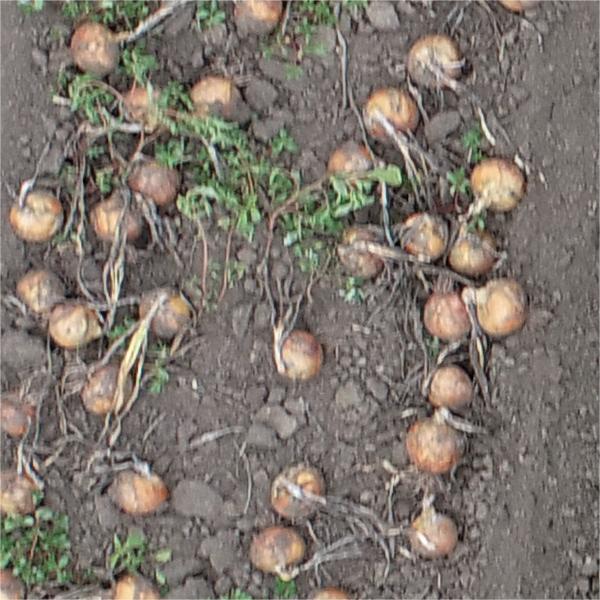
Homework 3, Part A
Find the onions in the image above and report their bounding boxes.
[424,293,468,338]
[0,397,35,438]
[408,32,461,90]
[364,88,417,134]
[11,190,60,240]
[113,573,162,599]
[427,365,472,408]
[117,80,151,121]
[80,363,129,415]
[450,235,493,274]
[343,222,383,250]
[269,464,322,520]
[0,570,26,599]
[494,0,544,9]
[476,281,526,335]
[404,415,462,471]
[47,301,98,346]
[401,213,448,260]
[69,21,121,75]
[277,331,320,378]
[340,240,381,280]
[327,141,372,180]
[236,0,282,36]
[113,470,166,514]
[409,513,456,557]
[470,158,525,209]
[147,295,192,343]
[251,525,306,575]
[127,160,179,206]
[91,198,140,241]
[16,268,62,311]
[2,478,37,518]
[310,584,352,599]
[190,74,244,122]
